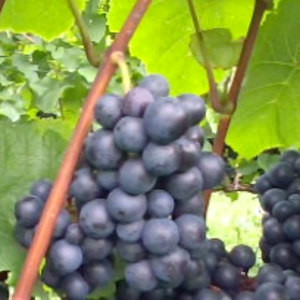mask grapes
Wrapping results in <instances>:
<instances>
[{
  "mask_svg": "<svg viewBox=\"0 0 300 300\" xmlns=\"http://www.w3.org/2000/svg\"><path fill=\"white\" fill-rule=\"evenodd\" d=\"M51 188L50 178H39L31 187V194L22 197L14 205L18 225L13 232V238L24 250L31 244Z\"/></svg>",
  "mask_w": 300,
  "mask_h": 300,
  "instance_id": "obj_2",
  "label": "grapes"
},
{
  "mask_svg": "<svg viewBox=\"0 0 300 300\" xmlns=\"http://www.w3.org/2000/svg\"><path fill=\"white\" fill-rule=\"evenodd\" d=\"M168 93L163 77L146 76L124 96L94 99L89 167L70 184L79 222L60 208L41 269L47 287L84 300L110 281L114 245L135 290L187 276L192 249L208 241L202 192L222 180L224 157L202 151V96Z\"/></svg>",
  "mask_w": 300,
  "mask_h": 300,
  "instance_id": "obj_1",
  "label": "grapes"
}]
</instances>
